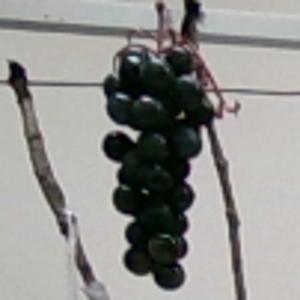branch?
<instances>
[{
  "instance_id": "30e6481e",
  "label": "branch",
  "mask_w": 300,
  "mask_h": 300,
  "mask_svg": "<svg viewBox=\"0 0 300 300\" xmlns=\"http://www.w3.org/2000/svg\"><path fill=\"white\" fill-rule=\"evenodd\" d=\"M8 64L7 84L13 91L17 109L20 112L25 147L37 186L55 218L59 234L70 245L74 267L84 286L79 290L86 300H111L105 284L97 278L82 243L78 218L69 208L67 196L56 179L52 162L46 150L45 137L34 108V97L30 91L27 67L14 58L6 59Z\"/></svg>"
},
{
  "instance_id": "325d2c04",
  "label": "branch",
  "mask_w": 300,
  "mask_h": 300,
  "mask_svg": "<svg viewBox=\"0 0 300 300\" xmlns=\"http://www.w3.org/2000/svg\"><path fill=\"white\" fill-rule=\"evenodd\" d=\"M208 138V146L213 165L217 174L218 186L224 203L225 220L227 223V241L230 248L231 272L233 273V285L235 300H248L247 285L245 283L244 259L242 258V220L237 208L233 184L230 180V164L227 160L215 121L205 128Z\"/></svg>"
},
{
  "instance_id": "170604dd",
  "label": "branch",
  "mask_w": 300,
  "mask_h": 300,
  "mask_svg": "<svg viewBox=\"0 0 300 300\" xmlns=\"http://www.w3.org/2000/svg\"><path fill=\"white\" fill-rule=\"evenodd\" d=\"M183 16L180 20L179 38L182 46L189 47L196 52L199 58V65L194 72V79L206 91L207 87V66L200 56L199 37L200 31L197 29L199 24L207 20V13L203 11V4L200 0H182Z\"/></svg>"
}]
</instances>
